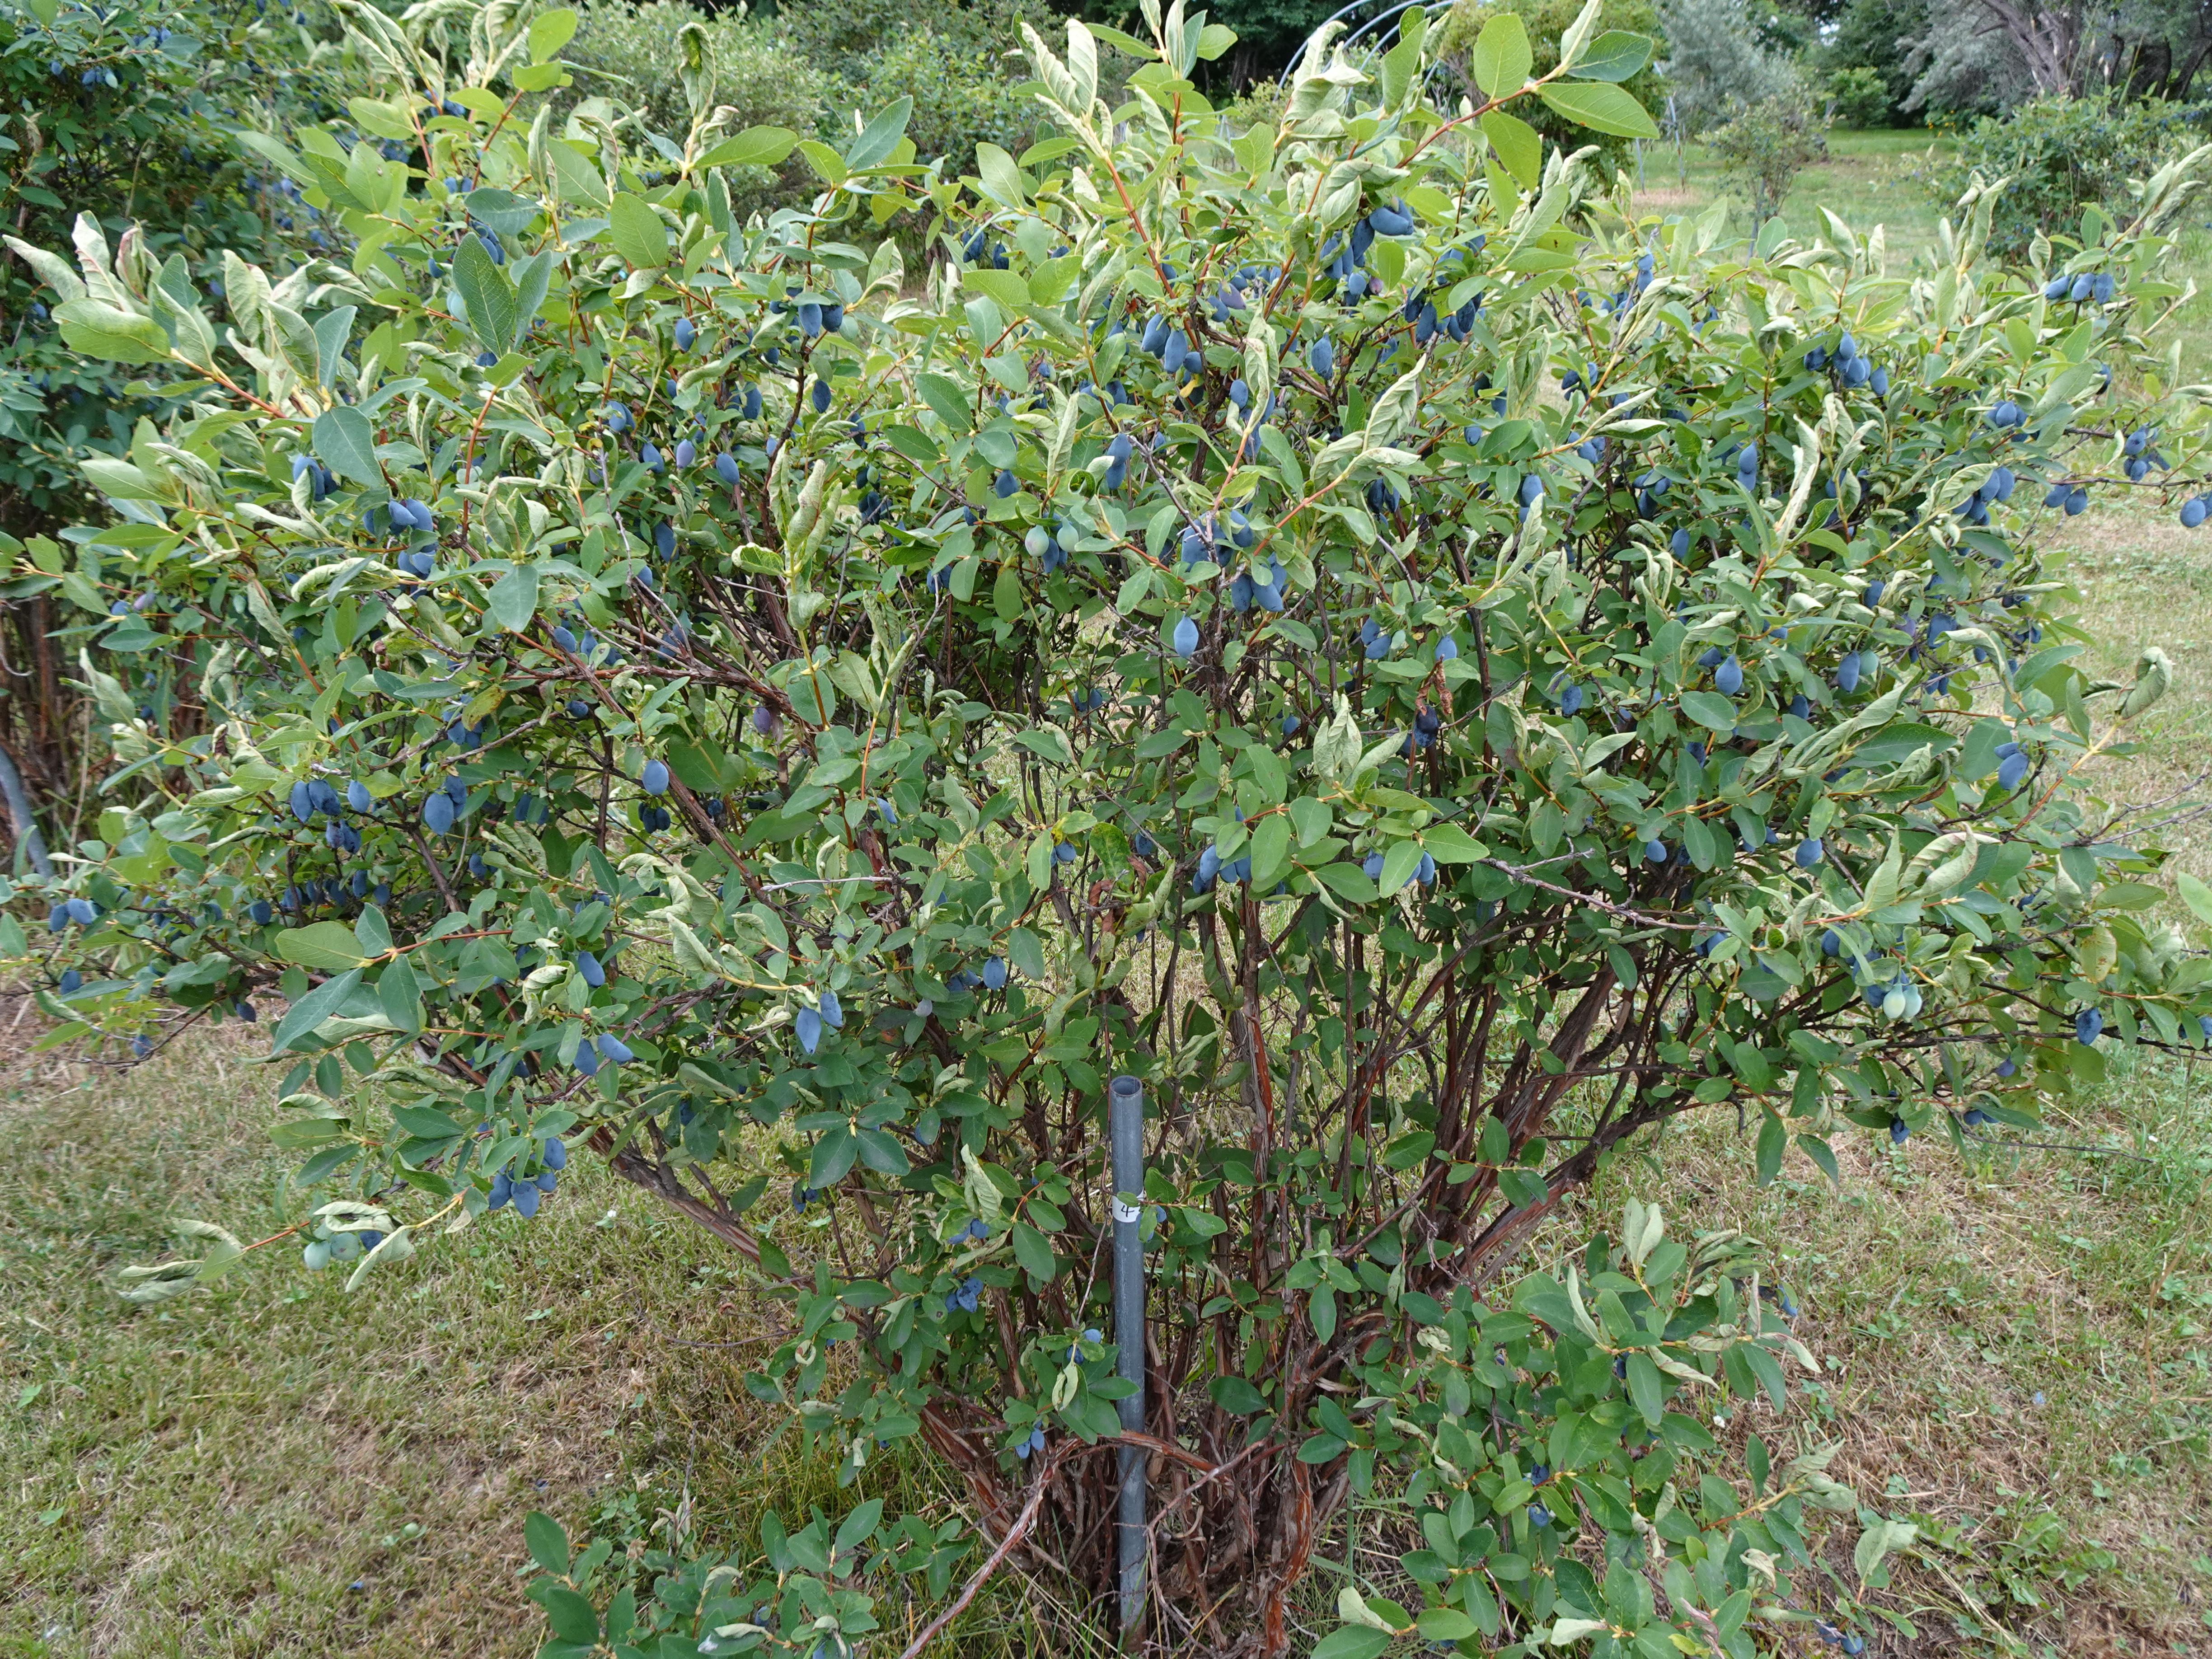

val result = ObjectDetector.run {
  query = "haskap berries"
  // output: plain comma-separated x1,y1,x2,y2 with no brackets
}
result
1106,432,1130,465
1834,330,1857,362
1576,289,1593,308
589,462,604,484
993,470,1020,498
1088,318,1106,342
643,761,670,799
1270,565,1286,589
1150,1204,1170,1222
1759,1286,1777,1301
1691,322,1707,333
1715,661,1744,696
1864,579,1887,607
461,694,486,733
1351,217,1376,266
1528,1503,1550,1526
947,975,970,993
606,647,623,664
1037,364,1050,377
488,845,500,875
2075,1008,2105,1046
2124,455,2137,474
674,438,697,466
552,542,569,554
404,493,436,542
806,1187,819,1205
1765,826,1780,845
1786,695,1813,722
284,887,304,910
1364,637,1393,658
994,243,1010,273
641,443,665,473
991,391,1012,418
867,465,880,484
690,412,709,440
444,177,456,192
1676,600,1694,621
292,455,327,499
1362,852,1385,879
1561,370,1581,388
1072,689,1087,713
1359,612,1381,647
946,1221,973,1243
1239,409,1262,457
327,719,340,734
826,1338,837,1346
965,506,982,526
1982,1115,2001,1126
2006,625,2024,649
424,788,453,837
473,220,501,242
1968,493,1989,521
1842,1629,1863,1655
1643,839,1668,866
1255,270,1271,291
1270,266,1284,283
1229,377,1247,412
1997,468,2016,502
981,956,1007,992
1963,1107,1985,1126
598,1035,635,1065
817,986,845,1028
1693,944,1707,956
1881,981,1904,1019
1679,882,1695,902
1367,206,1410,236
512,792,540,826
1563,387,1589,401
1411,1470,1423,1481
1236,855,1254,883
66,898,98,930
1388,198,1415,236
1493,388,1510,417
1616,708,1636,731
1895,967,1910,992
1147,1229,1155,1241
567,698,590,720
868,491,881,522
761,436,780,463
2129,460,2147,483
443,709,467,747
1024,521,1050,557
575,951,607,985
310,776,342,818
1088,687,1102,708
737,1086,748,1097
1200,846,1222,880
770,287,806,313
1836,654,1865,696
1404,729,1430,759
1616,1350,1635,1378
915,998,934,1017
1160,261,1177,289
525,1152,558,1191
1696,647,1724,676
847,416,868,444
110,597,132,617
1760,612,1790,641
1192,869,1211,895
2065,491,2091,516
1049,848,1058,867
1454,297,1482,333
389,521,405,537
303,1240,331,1271
1615,296,1634,320
1737,444,1759,473
839,917,856,941
1403,285,1428,324
1478,900,1495,923
152,912,165,926
1682,380,1699,408
934,890,949,908
718,885,724,896
655,809,672,831
1390,627,1410,651
47,903,79,935
372,866,390,876
970,1218,992,1239
1989,740,2030,758
1664,404,1689,424
1981,466,2000,504
59,970,84,994
162,918,179,941
1985,401,2007,427
1825,767,1849,781
444,775,468,811
632,563,658,591
1238,257,1257,279
879,1438,890,1448
1955,545,1971,556
1755,939,1776,975
1701,931,1731,960
1057,550,1070,570
1435,635,1459,664
1415,708,1441,740
1184,351,1207,374
408,582,428,598
1864,978,1893,1007
1479,482,1495,500
652,520,676,564
962,231,975,263
282,572,300,584
1923,670,1940,696
1613,393,1632,420
675,317,695,353
135,1034,149,1058
354,869,371,899
855,468,869,490
326,820,345,851
1550,669,1575,692
1334,231,1356,274
1704,307,1720,321
1212,525,1232,566
536,807,553,826
294,626,306,638
325,1232,357,1259
1473,375,1495,401
644,807,659,835
1437,1639,1456,1649
1234,807,1244,822
1107,382,1129,409
1858,650,1880,677
145,673,156,686
339,819,362,855
362,508,377,534
1615,261,1635,271
756,1606,773,1623
1344,666,1359,694
1182,512,1219,565
1995,402,2018,429
784,316,801,341
2027,628,2041,644
673,623,690,641
1163,328,1187,374
1974,647,1987,662
235,1001,259,1023
486,350,499,370
747,792,759,810
2039,482,2073,507
1994,580,2011,599
1279,330,1299,355
1048,364,1057,382
360,1225,382,1249
1685,741,1707,768
1450,242,1468,272
2125,425,2151,452
1468,235,1486,255
876,798,901,826
934,562,957,591
460,177,475,195
411,548,436,572
475,238,500,269
1567,432,1581,447
1924,616,1953,651
1824,509,1841,523
1102,295,1115,309
1889,1118,1910,1143
1470,290,1484,312
2043,276,2069,302
481,800,499,815
1381,482,1404,518
2091,362,2112,393
471,456,484,467
553,627,578,654
621,404,636,429
1226,509,1257,546
139,705,153,719
738,380,763,423
2178,1015,2212,1041
452,292,472,326
1735,469,1757,492
708,799,725,816
231,594,247,614
1368,274,1385,295
1216,278,1251,311
1821,1622,1844,1644
288,781,311,824
1518,473,1544,511
1417,852,1438,888
1795,839,1824,867
1416,513,1428,524
448,458,457,474
1055,838,1079,862
1224,266,1250,290
1030,1428,1046,1453
2089,273,2114,304
487,1173,514,1211
753,704,772,736
1992,1059,2016,1078
542,1135,567,1171
1282,714,1302,738
1710,412,1733,441
1563,543,1576,563
581,628,598,656
2017,892,2038,909
1184,371,1205,405
1058,518,1080,552
726,383,743,414
1434,248,1454,284
1901,988,1929,1024
1043,539,1060,580
1140,314,1170,354
1930,576,1946,599
476,1117,494,1133
1257,381,1278,422
1311,333,1337,376
1987,556,2005,569
367,869,380,886
1825,471,1847,498
141,895,156,905
1579,436,1606,465
1422,402,1438,421
1741,518,1752,530
1066,1343,1086,1365
249,899,273,924
1518,507,1531,522
1669,528,1693,564
330,881,346,906
446,661,459,671
1171,613,1199,662
1157,539,1176,564
516,943,535,977
678,1098,698,1125
385,502,418,527
1741,839,1757,853
1016,1438,1033,1459
1821,924,1843,954
571,1036,598,1076
1230,576,1254,613
2001,591,2024,611
525,328,535,340
914,1124,939,1146
1082,384,1100,399
1636,244,1655,271
1254,567,1286,614
1344,277,1361,306
573,899,591,914
1731,704,1741,738
375,884,393,904
2195,493,2212,518
1909,646,1920,664
924,569,942,594
657,625,687,659
1783,1294,1799,1317
639,802,651,821
1636,487,1663,519
643,886,662,897
857,493,871,514
1841,355,1869,388
1104,460,1125,492
820,286,844,331
810,378,832,415
1367,479,1384,517
493,241,506,265
1153,432,1165,452
2154,455,2170,470
1865,368,1887,400
469,855,486,877
513,1059,533,1078
322,467,346,495
1082,1329,1104,1344
791,1184,806,1215
831,1304,848,1321
1349,271,1370,295
1601,290,1619,311
605,400,629,434
427,259,446,277
1134,830,1161,862
745,327,754,344
1850,947,1875,981
592,894,611,907
511,1179,540,1220
1272,880,1288,906
2003,656,2023,684
1402,863,1423,886
536,318,547,326
1051,245,1070,259
306,879,334,908
1858,469,1871,490
201,901,227,927
962,969,981,986
796,1004,822,1055
1996,753,2028,790
581,898,595,913
1136,929,1146,943
798,298,822,335
1413,300,1442,343
1581,360,1599,391
813,1639,833,1658
717,452,744,486
1108,322,1124,341
764,346,780,367
1381,337,1399,361
1464,422,1486,449
396,550,419,575
1217,856,1237,883
1646,475,1670,499
475,352,489,365
957,1286,978,1314
1434,314,1452,335
1633,473,1655,487
1894,613,1920,641
1560,686,1587,717
2070,273,2096,303
965,227,990,260
1321,235,1343,277
1034,391,1048,409
465,731,483,750
945,1293,960,1313
1447,315,1467,343
1205,295,1231,325
1949,493,1976,515
347,778,371,815
892,522,908,546
2010,432,2027,442
964,1276,987,1294
1637,271,1655,293
565,598,590,622
2176,499,2205,529
666,380,679,399
134,593,156,609
1419,521,1430,531
1676,843,1692,866
2013,406,2029,426
1803,332,1830,370
1938,676,1951,696
632,519,645,540
1531,1462,1552,1486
